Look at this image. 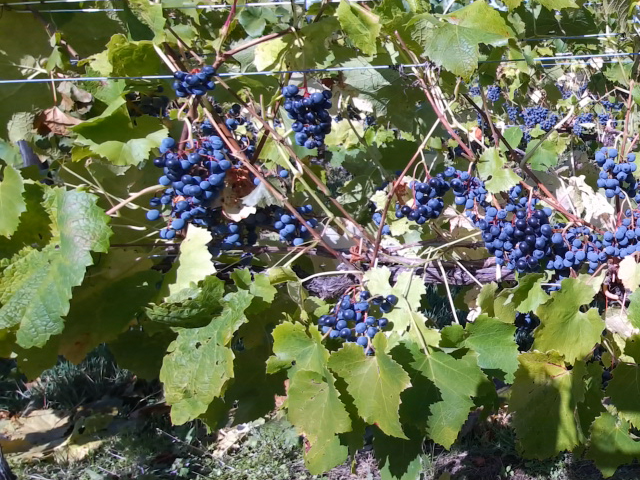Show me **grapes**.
<instances>
[{"label":"grapes","instance_id":"9","mask_svg":"<svg viewBox=\"0 0 640 480\" xmlns=\"http://www.w3.org/2000/svg\"><path fill=\"white\" fill-rule=\"evenodd\" d=\"M240 114H241V105L239 103H234L229 111V115L231 117H228L225 120V126L229 130H236L238 126L241 124V121L239 119Z\"/></svg>","mask_w":640,"mask_h":480},{"label":"grapes","instance_id":"1","mask_svg":"<svg viewBox=\"0 0 640 480\" xmlns=\"http://www.w3.org/2000/svg\"><path fill=\"white\" fill-rule=\"evenodd\" d=\"M484 186L482 178L471 177L468 171L447 166L427 183L411 181L409 189L415 191L416 208L413 210L409 205L397 204L394 213L397 218H407L417 225H425L429 219L437 220L445 203L435 197L445 196L451 187L456 197L455 204L465 205L464 215L482 231L483 246L495 256L498 266L506 264L512 271L525 273L537 268L539 260H542L546 262L548 271L559 270L555 284L567 279L570 268L579 266L581 262H589L586 272L593 275L599 264L610 256L624 259L640 252V206L633 213L627 208L622 225L614 232L605 230L602 240L583 225L570 228L564 239L562 233H553L550 226L548 217L552 215V209H536L535 205L540 202L537 198L531 199V216L525 220L529 198L523 196L517 202L523 192L521 185L509 189L508 203L501 210L485 202L488 190ZM475 201L485 210L484 218L476 219V215L469 211L474 208ZM581 234L588 236L585 244L588 251L581 249L583 241L578 238Z\"/></svg>","mask_w":640,"mask_h":480},{"label":"grapes","instance_id":"4","mask_svg":"<svg viewBox=\"0 0 640 480\" xmlns=\"http://www.w3.org/2000/svg\"><path fill=\"white\" fill-rule=\"evenodd\" d=\"M371 297L369 290H362L359 293L360 300L355 303L351 300L349 294L343 296V300L339 303V310L335 316L324 313L317 318V324L321 328V332L326 334L328 330L335 326L328 333L330 339L341 338L348 343H357L359 346L366 348L368 346L369 339H373L375 334L379 331L378 327H386L389 324V320L385 317L367 316L365 322L363 321V312L370 310V303L368 300ZM354 321V331L358 335H351L353 330L348 328V322Z\"/></svg>","mask_w":640,"mask_h":480},{"label":"grapes","instance_id":"7","mask_svg":"<svg viewBox=\"0 0 640 480\" xmlns=\"http://www.w3.org/2000/svg\"><path fill=\"white\" fill-rule=\"evenodd\" d=\"M216 72L217 69L212 65L201 68L197 74L182 73L180 70H176L173 73V78L176 81L171 83V88L179 98H185L189 94L205 95L207 90L214 91L216 89V84L212 80L216 76Z\"/></svg>","mask_w":640,"mask_h":480},{"label":"grapes","instance_id":"3","mask_svg":"<svg viewBox=\"0 0 640 480\" xmlns=\"http://www.w3.org/2000/svg\"><path fill=\"white\" fill-rule=\"evenodd\" d=\"M283 95L286 115L296 120L291 130L295 133L294 142L299 147L313 149L321 146L327 135L332 133L330 113L325 109L333 106L332 93L328 90L312 92L299 96L300 89L296 85H284L280 88Z\"/></svg>","mask_w":640,"mask_h":480},{"label":"grapes","instance_id":"5","mask_svg":"<svg viewBox=\"0 0 640 480\" xmlns=\"http://www.w3.org/2000/svg\"><path fill=\"white\" fill-rule=\"evenodd\" d=\"M619 155L617 148L602 147L598 149L594 155L595 164L602 168L598 172V179L595 181V186L599 189H604V195L608 199H613L616 196L623 200L625 195L620 190L623 186V182L629 184L625 188L626 195L630 199H634L637 204H640V193H637V188L640 187V180H634V176L631 174L637 169L635 163L637 155L635 153H628L626 155V162L617 163L616 159Z\"/></svg>","mask_w":640,"mask_h":480},{"label":"grapes","instance_id":"2","mask_svg":"<svg viewBox=\"0 0 640 480\" xmlns=\"http://www.w3.org/2000/svg\"><path fill=\"white\" fill-rule=\"evenodd\" d=\"M202 135L206 138L200 146L193 152L186 154L183 158L173 152L177 146L174 137H167L161 140L159 152L162 156L153 159L156 168H163V174L157 178V183L166 188L164 194L155 196L149 200L152 208L160 206L171 207V229L164 227L158 231L161 240H172L176 236V231H181L186 226V221H192L195 225L213 227L216 236H223L217 244L209 249L213 257L219 255L221 249H236L243 245L238 223H217L214 214L207 203L220 196L218 187L227 177V171L231 168V163L236 169L242 165L233 152L227 147L223 139L217 135L212 123L204 120L200 124ZM206 154L213 159H207L203 166L207 169L206 181L202 175L192 176L189 174L194 165H198L201 157Z\"/></svg>","mask_w":640,"mask_h":480},{"label":"grapes","instance_id":"8","mask_svg":"<svg viewBox=\"0 0 640 480\" xmlns=\"http://www.w3.org/2000/svg\"><path fill=\"white\" fill-rule=\"evenodd\" d=\"M384 297L379 295L377 298L372 300V304L374 306H378V311L380 313H389L392 310V307L398 302V297L395 294H389L385 297L386 303H383Z\"/></svg>","mask_w":640,"mask_h":480},{"label":"grapes","instance_id":"6","mask_svg":"<svg viewBox=\"0 0 640 480\" xmlns=\"http://www.w3.org/2000/svg\"><path fill=\"white\" fill-rule=\"evenodd\" d=\"M245 231L248 232L247 244L254 245L259 240L256 233V226L272 227L278 231L279 240L281 242H290L293 246L304 244L306 240L311 238V233L307 231L292 215L291 212H285L282 207H278L274 213V218L260 208L256 209V213H250L248 218L243 219Z\"/></svg>","mask_w":640,"mask_h":480}]
</instances>
